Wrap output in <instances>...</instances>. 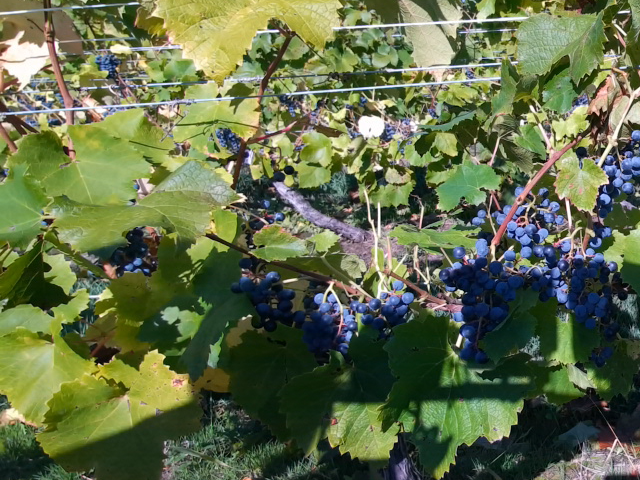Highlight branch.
I'll use <instances>...</instances> for the list:
<instances>
[{
  "label": "branch",
  "mask_w": 640,
  "mask_h": 480,
  "mask_svg": "<svg viewBox=\"0 0 640 480\" xmlns=\"http://www.w3.org/2000/svg\"><path fill=\"white\" fill-rule=\"evenodd\" d=\"M584 137H585V134L583 132H579L571 141H569L567 144L563 145L552 157H550L542 165V167H540L538 169V171L534 175L533 179H530L528 181V183L524 187V189L521 192V194L519 195V197H517L513 201V203L510 205V208H509L506 216L502 220L501 224L498 226V229L495 231V233L493 235V243L495 245H498L500 243V238H501L502 234L505 232V229L508 227V225L511 222V220L513 219V216L515 215L517 208L519 207V205L521 203H523L526 200V198L528 196L527 191H531L533 187H536L538 185V182L540 181V179L545 174V172L555 162H557L567 151H569L572 148H574Z\"/></svg>",
  "instance_id": "branch-1"
},
{
  "label": "branch",
  "mask_w": 640,
  "mask_h": 480,
  "mask_svg": "<svg viewBox=\"0 0 640 480\" xmlns=\"http://www.w3.org/2000/svg\"><path fill=\"white\" fill-rule=\"evenodd\" d=\"M44 27H45V32H46V42H47V51L48 54L50 55V59L52 62V65L55 69V74H56V78L58 80V85H59V90L61 93V96L63 97V100L65 102V104L67 106H70L72 104V100L70 95L68 94L67 91V87H66V83H65V78L62 72V67L61 64L58 60V57L56 55L55 52V48H54V38H55V34H54V25H53V20H52V13L50 12H46L44 14Z\"/></svg>",
  "instance_id": "branch-2"
},
{
  "label": "branch",
  "mask_w": 640,
  "mask_h": 480,
  "mask_svg": "<svg viewBox=\"0 0 640 480\" xmlns=\"http://www.w3.org/2000/svg\"><path fill=\"white\" fill-rule=\"evenodd\" d=\"M270 265H275L277 267H282L284 269L290 270V271H294V272H300L303 273L309 277H312L314 279H318L324 283H327L328 285L333 286L334 288H338V289H342L345 291H349L350 293L354 294L355 296H359L361 294V291L348 283H344V282H340L337 281L329 276H326L320 272H316L314 270H311L305 266L302 265H296L293 263H289L286 262L284 260L281 261H270Z\"/></svg>",
  "instance_id": "branch-3"
},
{
  "label": "branch",
  "mask_w": 640,
  "mask_h": 480,
  "mask_svg": "<svg viewBox=\"0 0 640 480\" xmlns=\"http://www.w3.org/2000/svg\"><path fill=\"white\" fill-rule=\"evenodd\" d=\"M384 272L389 276L392 277L394 279L400 280L403 283H405L410 289H412L415 293H417L420 296H423L424 298H426L427 300L433 302L434 304H438V305H443L445 303V300L443 298L440 297H436L435 295L431 294L430 292H428L427 290L420 288L416 283H414L409 277H407L406 275L396 272L392 269H390L389 267H386L384 269Z\"/></svg>",
  "instance_id": "branch-4"
},
{
  "label": "branch",
  "mask_w": 640,
  "mask_h": 480,
  "mask_svg": "<svg viewBox=\"0 0 640 480\" xmlns=\"http://www.w3.org/2000/svg\"><path fill=\"white\" fill-rule=\"evenodd\" d=\"M291 40V36L287 35L285 37V41L283 43V47L280 50V52L276 55V57L274 58L272 64L270 65L268 71L264 74L263 80H262V84L259 86L258 92L262 93L264 91V89L267 86V82L269 80V77L272 75V73L274 72L279 60L282 58V56L286 53L289 43Z\"/></svg>",
  "instance_id": "branch-5"
},
{
  "label": "branch",
  "mask_w": 640,
  "mask_h": 480,
  "mask_svg": "<svg viewBox=\"0 0 640 480\" xmlns=\"http://www.w3.org/2000/svg\"><path fill=\"white\" fill-rule=\"evenodd\" d=\"M209 238L216 242L217 244L225 247L226 249L230 250L231 252H235L238 253L240 255H247L249 253V250L247 248H242L240 246L234 245L231 242L225 240L222 237H219L218 235H216L215 233H211L209 235Z\"/></svg>",
  "instance_id": "branch-6"
},
{
  "label": "branch",
  "mask_w": 640,
  "mask_h": 480,
  "mask_svg": "<svg viewBox=\"0 0 640 480\" xmlns=\"http://www.w3.org/2000/svg\"><path fill=\"white\" fill-rule=\"evenodd\" d=\"M245 148H246V143L242 142L238 150V160L236 161V166L233 168L234 183L231 185L232 189L236 188L237 181L239 180V170L241 168V164L243 163V153L245 151Z\"/></svg>",
  "instance_id": "branch-7"
},
{
  "label": "branch",
  "mask_w": 640,
  "mask_h": 480,
  "mask_svg": "<svg viewBox=\"0 0 640 480\" xmlns=\"http://www.w3.org/2000/svg\"><path fill=\"white\" fill-rule=\"evenodd\" d=\"M593 221H594V216L590 215L588 218V226H587L589 228V231L585 232L583 234V237L581 238V247L583 250H586L587 247L589 246V238L593 228Z\"/></svg>",
  "instance_id": "branch-8"
}]
</instances>
